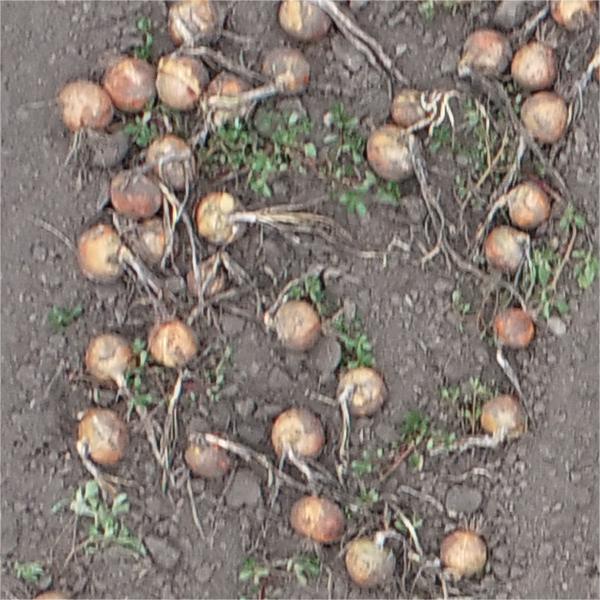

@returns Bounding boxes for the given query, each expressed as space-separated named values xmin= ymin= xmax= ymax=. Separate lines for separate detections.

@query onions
xmin=109 ymin=170 xmax=160 ymax=217
xmin=278 ymin=0 xmax=330 ymax=41
xmin=343 ymin=535 xmax=393 ymax=584
xmin=367 ymin=127 xmax=415 ymax=179
xmin=520 ymin=92 xmax=570 ymax=141
xmin=459 ymin=30 xmax=509 ymax=78
xmin=272 ymin=408 xmax=323 ymax=458
xmin=72 ymin=408 xmax=130 ymax=466
xmin=480 ymin=395 xmax=526 ymax=439
xmin=505 ymin=183 xmax=550 ymax=228
xmin=271 ymin=300 xmax=320 ymax=350
xmin=290 ymin=495 xmax=345 ymax=542
xmin=389 ymin=89 xmax=424 ymax=126
xmin=166 ymin=3 xmax=222 ymax=44
xmin=439 ymin=529 xmax=486 ymax=575
xmin=73 ymin=224 xmax=124 ymax=279
xmin=263 ymin=46 xmax=310 ymax=93
xmin=130 ymin=218 xmax=170 ymax=263
xmin=513 ymin=43 xmax=556 ymax=89
xmin=37 ymin=583 xmax=71 ymax=599
xmin=185 ymin=434 xmax=229 ymax=478
xmin=191 ymin=192 xmax=239 ymax=241
xmin=157 ymin=63 xmax=204 ymax=110
xmin=492 ymin=308 xmax=533 ymax=347
xmin=147 ymin=321 xmax=196 ymax=367
xmin=483 ymin=226 xmax=529 ymax=274
xmin=85 ymin=334 xmax=134 ymax=380
xmin=143 ymin=136 xmax=195 ymax=191
xmin=204 ymin=72 xmax=249 ymax=99
xmin=103 ymin=58 xmax=155 ymax=110
xmin=552 ymin=0 xmax=591 ymax=27
xmin=337 ymin=368 xmax=385 ymax=415
xmin=57 ymin=80 xmax=112 ymax=129
xmin=194 ymin=256 xmax=232 ymax=295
